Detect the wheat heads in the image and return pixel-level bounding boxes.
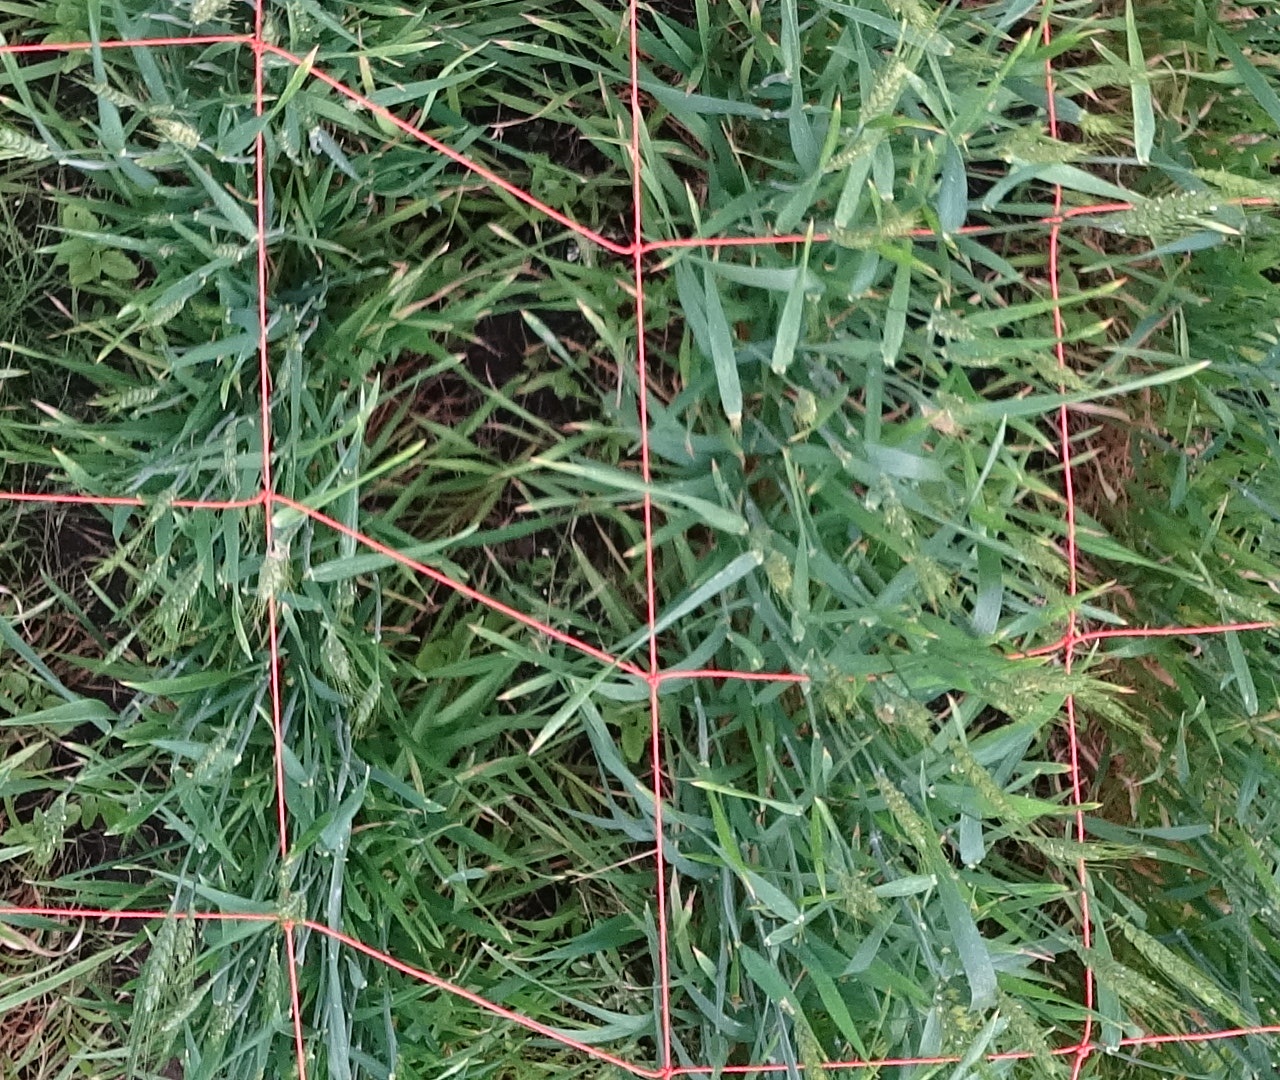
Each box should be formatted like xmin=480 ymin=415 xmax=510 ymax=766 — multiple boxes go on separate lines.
xmin=1064 ymin=938 xmax=1151 ymax=1011
xmin=136 ymin=900 xmax=176 ymax=1008
xmin=210 ymin=1003 xmax=240 ymax=1045
xmin=964 ymin=670 xmax=1091 ymax=700
xmin=89 ymin=81 xmax=128 ymax=109
xmin=869 ymin=468 xmax=913 ymax=533
xmin=176 ymin=897 xmax=203 ymax=956
xmin=1032 ymin=833 xmax=1123 ymax=870
xmin=194 ymin=0 xmax=220 ymax=28
xmin=890 ymin=694 xmax=934 ymax=740
xmin=1077 ymin=60 xmax=1143 ymax=84
xmin=1002 ymin=136 xmax=1078 ymax=171
xmin=994 ymin=988 xmax=1059 ymax=1073
xmin=0 ymin=128 xmax=54 ymax=160
xmin=150 ymin=298 xmax=192 ymax=330
xmin=291 ymin=1035 xmax=320 ymax=1074
xmin=106 ymin=631 xmax=138 ymax=670
xmin=818 ymin=656 xmax=850 ymax=693
xmin=906 ymin=553 xmax=948 ymax=588
xmin=795 ymin=385 xmax=819 ymax=430
xmin=130 ymin=555 xmax=164 ymax=603
xmin=938 ymin=983 xmax=986 ymax=1072
xmin=883 ymin=206 xmax=922 ymax=242
xmin=1110 ymin=913 xmax=1223 ymax=1010
xmin=835 ymin=867 xmax=881 ymax=915
xmin=832 ymin=222 xmax=872 ymax=249
xmin=224 ymin=420 xmax=240 ymax=486
xmin=212 ymin=243 xmax=242 ymax=261
xmin=931 ymin=304 xmax=978 ymax=353
xmin=1034 ymin=580 xmax=1072 ymax=605
xmin=146 ymin=482 xmax=178 ymax=528
xmin=1035 ymin=342 xmax=1079 ymax=389
xmin=41 ymin=794 xmax=74 ymax=845
xmin=319 ymin=629 xmax=350 ymax=678
xmin=192 ymin=734 xmax=234 ymax=783
xmin=1198 ymin=578 xmax=1279 ymax=632
xmin=114 ymin=383 xmax=161 ymax=412
xmin=92 ymin=543 xmax=133 ymax=582
xmin=265 ymin=16 xmax=276 ymax=47
xmin=893 ymin=0 xmax=941 ymax=31
xmin=265 ymin=952 xmax=286 ymax=1000
xmin=1197 ymin=159 xmax=1277 ymax=202
xmin=826 ymin=145 xmax=869 ymax=174
xmin=1101 ymin=195 xmax=1209 ymax=235
xmin=292 ymin=1 xmax=313 ymax=34
xmin=866 ymin=767 xmax=927 ymax=848
xmin=950 ymin=736 xmax=1014 ymax=824
xmin=158 ymin=118 xmax=198 ymax=151
xmin=355 ymin=676 xmax=385 ymax=716
xmin=789 ymin=1014 xmax=827 ymax=1080
xmin=259 ymin=553 xmax=287 ymax=599
xmin=162 ymin=976 xmax=216 ymax=1037
xmin=763 ymin=551 xmax=802 ymax=596
xmin=1005 ymin=528 xmax=1068 ymax=577
xmin=162 ymin=558 xmax=202 ymax=624
xmin=855 ymin=55 xmax=901 ymax=125
xmin=1081 ymin=109 xmax=1117 ymax=141
xmin=276 ymin=888 xmax=309 ymax=928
